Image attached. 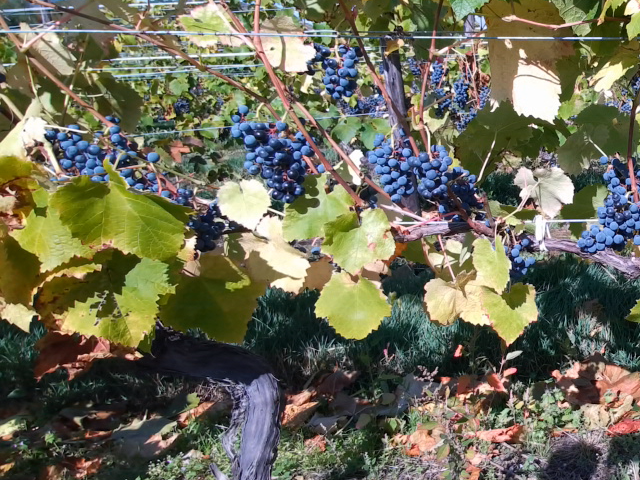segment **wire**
Instances as JSON below:
<instances>
[{"label": "wire", "instance_id": "wire-1", "mask_svg": "<svg viewBox=\"0 0 640 480\" xmlns=\"http://www.w3.org/2000/svg\"><path fill=\"white\" fill-rule=\"evenodd\" d=\"M62 33H93L102 35H157V36H207V37H290L296 39H381V40H460L467 42H491V41H528L537 40L545 42H569V41H603L619 42L627 39L626 35L616 37L606 36H581L571 35L566 37H551L550 35H523V36H488L470 37L463 35H383V34H298L293 32H209V31H187V30H104L96 28H59L55 30H32V29H0V34H30V35H58Z\"/></svg>", "mask_w": 640, "mask_h": 480}]
</instances>
